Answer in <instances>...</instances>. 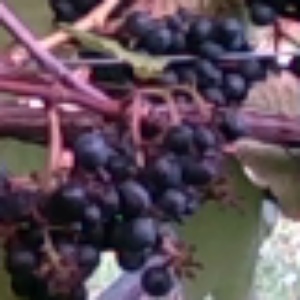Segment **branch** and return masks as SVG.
<instances>
[{"mask_svg": "<svg viewBox=\"0 0 300 300\" xmlns=\"http://www.w3.org/2000/svg\"><path fill=\"white\" fill-rule=\"evenodd\" d=\"M117 0H100L66 28L36 36L9 5L0 3V22L17 43L0 54V134L47 133L45 174L71 168L76 159L65 144V127H99L133 118V94H140L141 117L161 129L174 122L214 126L227 136L259 138L265 143L300 150V115L253 106L156 104L134 89L121 96L96 83L88 63L71 69L52 51L89 32L112 12ZM33 60L49 72L23 69Z\"/></svg>", "mask_w": 300, "mask_h": 300, "instance_id": "branch-1", "label": "branch"}]
</instances>
